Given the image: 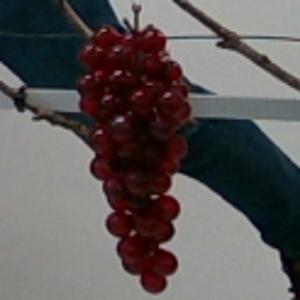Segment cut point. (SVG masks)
<instances>
[{
	"label": "cut point",
	"instance_id": "cut-point-1",
	"mask_svg": "<svg viewBox=\"0 0 300 300\" xmlns=\"http://www.w3.org/2000/svg\"><path fill=\"white\" fill-rule=\"evenodd\" d=\"M129 10L133 14V34L140 36L141 13L144 11L142 0H132Z\"/></svg>",
	"mask_w": 300,
	"mask_h": 300
}]
</instances>
